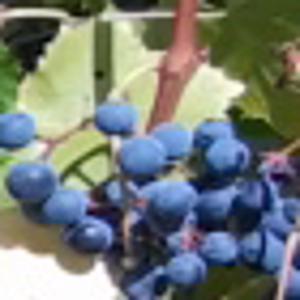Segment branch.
Here are the masks:
<instances>
[{
	"instance_id": "obj_1",
	"label": "branch",
	"mask_w": 300,
	"mask_h": 300,
	"mask_svg": "<svg viewBox=\"0 0 300 300\" xmlns=\"http://www.w3.org/2000/svg\"><path fill=\"white\" fill-rule=\"evenodd\" d=\"M172 27L164 50L166 64L157 70L158 86L151 96V117L144 128L173 122L179 113V97L191 75L206 63V50L196 44L199 33L196 0H177Z\"/></svg>"
}]
</instances>
